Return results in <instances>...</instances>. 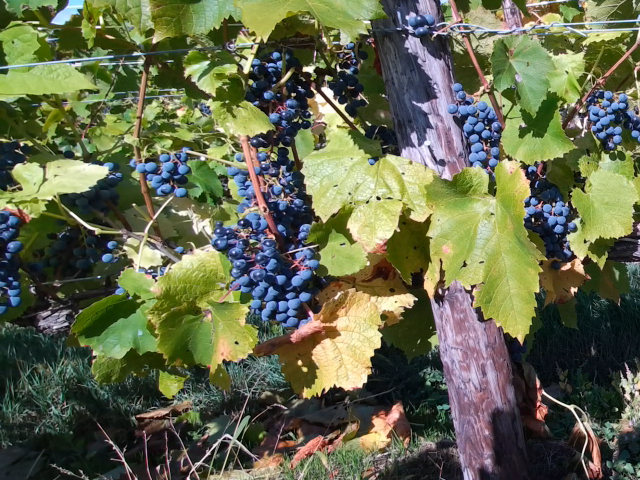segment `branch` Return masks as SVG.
<instances>
[{
	"label": "branch",
	"instance_id": "170604dd",
	"mask_svg": "<svg viewBox=\"0 0 640 480\" xmlns=\"http://www.w3.org/2000/svg\"><path fill=\"white\" fill-rule=\"evenodd\" d=\"M638 46H640V40L636 41L616 62L613 66L610 67L609 70H607L604 74V76H601L600 79H598L595 84L589 89L588 92H586L583 97L580 99V101L572 108V110L566 115L563 123H562V128L566 129L567 125L570 121V119L576 114V112L579 110V108H581L583 106V104L587 101V99L589 97L592 96V94L595 92V90L602 84L605 82V80H607L609 78V76L621 65V63H623L627 57L632 54L637 48Z\"/></svg>",
	"mask_w": 640,
	"mask_h": 480
},
{
	"label": "branch",
	"instance_id": "982ccf7c",
	"mask_svg": "<svg viewBox=\"0 0 640 480\" xmlns=\"http://www.w3.org/2000/svg\"><path fill=\"white\" fill-rule=\"evenodd\" d=\"M139 178H140L141 196L144 199V203L146 204V209L149 214V218L153 219L155 216V210L153 208V200L150 195L151 194L150 188L148 186V183L145 181L144 174H140Z\"/></svg>",
	"mask_w": 640,
	"mask_h": 480
},
{
	"label": "branch",
	"instance_id": "ea751061",
	"mask_svg": "<svg viewBox=\"0 0 640 480\" xmlns=\"http://www.w3.org/2000/svg\"><path fill=\"white\" fill-rule=\"evenodd\" d=\"M152 230L155 234V236L160 240L163 241L164 240V236L162 235L160 229H159V224H158V220L154 219L152 222Z\"/></svg>",
	"mask_w": 640,
	"mask_h": 480
},
{
	"label": "branch",
	"instance_id": "45aa463d",
	"mask_svg": "<svg viewBox=\"0 0 640 480\" xmlns=\"http://www.w3.org/2000/svg\"><path fill=\"white\" fill-rule=\"evenodd\" d=\"M152 60V56H148L146 57L145 60V64L143 67V71L141 73V78H140V83H139V90H138V101H137V106H136V114H135V124H134V128H133V136L135 138H138L140 136V126H141V120H142V112H143V103H144V93L147 90V80L149 77V66H150V62Z\"/></svg>",
	"mask_w": 640,
	"mask_h": 480
},
{
	"label": "branch",
	"instance_id": "30e6481e",
	"mask_svg": "<svg viewBox=\"0 0 640 480\" xmlns=\"http://www.w3.org/2000/svg\"><path fill=\"white\" fill-rule=\"evenodd\" d=\"M241 142L243 145V156H244V161H245V170L248 173V177L252 182L253 185V189H254V195L256 197V202L258 204V207L261 210V213L263 214V216L265 217L266 221H267V225H268V229L270 230V232L272 233V236L274 237V239L276 240L277 244H278V248L279 250L285 251L286 250V245L285 242L283 240V238L281 237L280 233L278 232L277 227L275 226L274 223V218L273 216L270 214L267 206L265 205V202L263 200V195L261 193V189H263L265 187V183L263 180V177L261 175H257L255 174V171L252 167V165L254 167H257L259 165V161L256 158V154H257V149L255 147H252L250 149V143L249 140L246 136H243L241 138Z\"/></svg>",
	"mask_w": 640,
	"mask_h": 480
},
{
	"label": "branch",
	"instance_id": "325d2c04",
	"mask_svg": "<svg viewBox=\"0 0 640 480\" xmlns=\"http://www.w3.org/2000/svg\"><path fill=\"white\" fill-rule=\"evenodd\" d=\"M461 40L463 42V46L465 48L470 64L473 67L475 74L478 76L480 82L485 87L486 95L490 100L491 106L493 107V110L495 112L499 125L501 127H505L507 125V122L505 121L504 115L497 101L496 95L493 93L492 84L487 80L484 72L481 70L480 65L478 64L474 50L472 49V46L470 44L469 38L466 35H463L461 37Z\"/></svg>",
	"mask_w": 640,
	"mask_h": 480
},
{
	"label": "branch",
	"instance_id": "1ff4a987",
	"mask_svg": "<svg viewBox=\"0 0 640 480\" xmlns=\"http://www.w3.org/2000/svg\"><path fill=\"white\" fill-rule=\"evenodd\" d=\"M448 3H449V7H450V11H451L453 20L455 22H460L461 21V17H460V14L458 12V8H457V5H456V0H448Z\"/></svg>",
	"mask_w": 640,
	"mask_h": 480
}]
</instances>
